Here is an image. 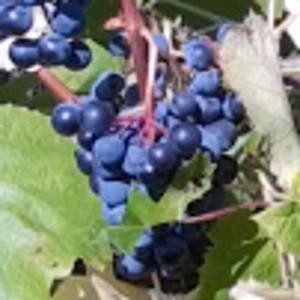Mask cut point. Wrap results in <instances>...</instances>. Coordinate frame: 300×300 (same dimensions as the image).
Instances as JSON below:
<instances>
[{"label":"cut point","instance_id":"6a23745f","mask_svg":"<svg viewBox=\"0 0 300 300\" xmlns=\"http://www.w3.org/2000/svg\"><path fill=\"white\" fill-rule=\"evenodd\" d=\"M139 35L146 44L149 53L148 77L144 85L142 108L144 110H150L152 108L153 90L157 81L158 49L155 46V40L152 34L146 27L139 29Z\"/></svg>","mask_w":300,"mask_h":300}]
</instances>
